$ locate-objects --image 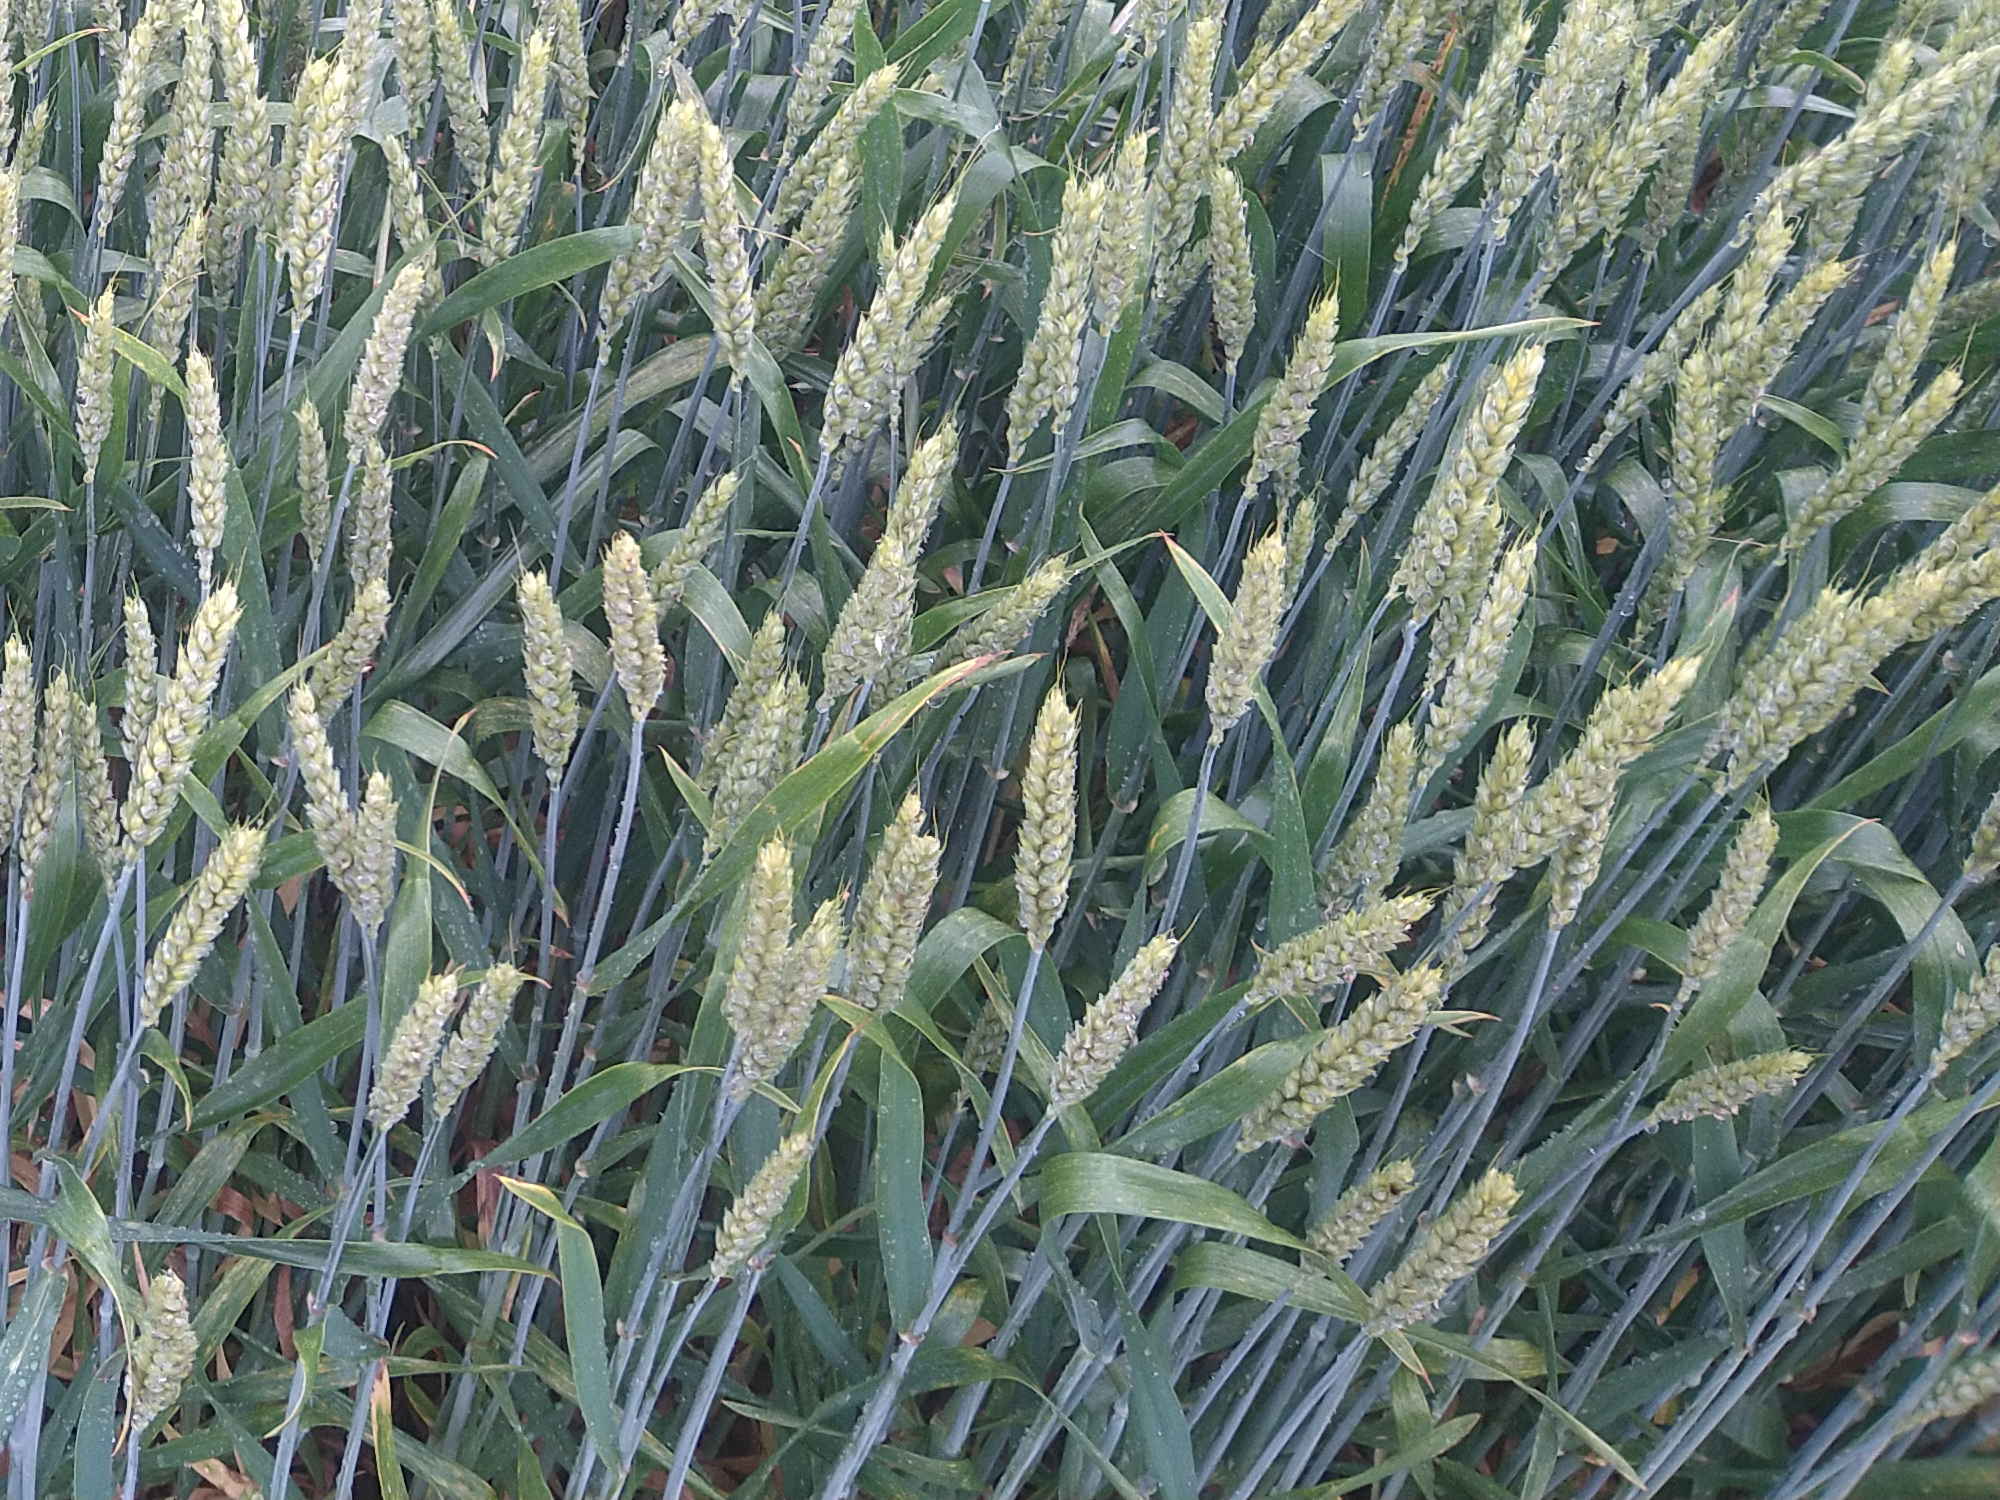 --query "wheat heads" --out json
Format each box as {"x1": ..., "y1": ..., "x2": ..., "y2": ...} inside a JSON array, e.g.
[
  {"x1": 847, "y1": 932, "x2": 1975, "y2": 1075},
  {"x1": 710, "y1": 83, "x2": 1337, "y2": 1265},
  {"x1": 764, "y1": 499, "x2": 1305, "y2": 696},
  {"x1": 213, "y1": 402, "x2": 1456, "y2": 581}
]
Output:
[
  {"x1": 289, "y1": 66, "x2": 349, "y2": 319},
  {"x1": 558, "y1": 0, "x2": 588, "y2": 160},
  {"x1": 731, "y1": 903, "x2": 845, "y2": 1092},
  {"x1": 1319, "y1": 727, "x2": 1420, "y2": 916},
  {"x1": 1049, "y1": 941, "x2": 1179, "y2": 1110},
  {"x1": 1239, "y1": 972, "x2": 1447, "y2": 1150},
  {"x1": 1717, "y1": 224, "x2": 1796, "y2": 349},
  {"x1": 1654, "y1": 1052, "x2": 1812, "y2": 1119},
  {"x1": 518, "y1": 570, "x2": 578, "y2": 783},
  {"x1": 1492, "y1": 663, "x2": 1701, "y2": 864},
  {"x1": 1715, "y1": 267, "x2": 1852, "y2": 440},
  {"x1": 1210, "y1": 0, "x2": 1382, "y2": 165},
  {"x1": 1582, "y1": 286, "x2": 1722, "y2": 460},
  {"x1": 288, "y1": 685, "x2": 353, "y2": 887},
  {"x1": 430, "y1": 966, "x2": 525, "y2": 1116},
  {"x1": 601, "y1": 533, "x2": 666, "y2": 711},
  {"x1": 861, "y1": 248, "x2": 943, "y2": 360},
  {"x1": 712, "y1": 1138, "x2": 812, "y2": 1276},
  {"x1": 1530, "y1": 150, "x2": 1646, "y2": 297},
  {"x1": 881, "y1": 435, "x2": 955, "y2": 562},
  {"x1": 960, "y1": 1001, "x2": 1011, "y2": 1089},
  {"x1": 1210, "y1": 169, "x2": 1256, "y2": 353},
  {"x1": 73, "y1": 700, "x2": 123, "y2": 879},
  {"x1": 1248, "y1": 302, "x2": 1342, "y2": 485},
  {"x1": 1932, "y1": 940, "x2": 2000, "y2": 1069},
  {"x1": 27, "y1": 277, "x2": 47, "y2": 346},
  {"x1": 827, "y1": 196, "x2": 958, "y2": 397},
  {"x1": 1418, "y1": 547, "x2": 1537, "y2": 784},
  {"x1": 148, "y1": 145, "x2": 183, "y2": 272},
  {"x1": 821, "y1": 525, "x2": 925, "y2": 697},
  {"x1": 1789, "y1": 375, "x2": 1965, "y2": 547},
  {"x1": 647, "y1": 475, "x2": 741, "y2": 622},
  {"x1": 1249, "y1": 896, "x2": 1435, "y2": 1004},
  {"x1": 78, "y1": 0, "x2": 124, "y2": 59},
  {"x1": 343, "y1": 265, "x2": 429, "y2": 459},
  {"x1": 1897, "y1": 1352, "x2": 2000, "y2": 1431},
  {"x1": 821, "y1": 298, "x2": 952, "y2": 478},
  {"x1": 851, "y1": 838, "x2": 943, "y2": 1014},
  {"x1": 1329, "y1": 366, "x2": 1451, "y2": 548},
  {"x1": 1550, "y1": 750, "x2": 1618, "y2": 923},
  {"x1": 1367, "y1": 1174, "x2": 1523, "y2": 1324},
  {"x1": 217, "y1": 0, "x2": 254, "y2": 101},
  {"x1": 1426, "y1": 509, "x2": 1504, "y2": 684},
  {"x1": 668, "y1": 0, "x2": 788, "y2": 56},
  {"x1": 390, "y1": 0, "x2": 433, "y2": 129},
  {"x1": 122, "y1": 586, "x2": 245, "y2": 854},
  {"x1": 1493, "y1": 28, "x2": 1635, "y2": 224},
  {"x1": 296, "y1": 477, "x2": 332, "y2": 557},
  {"x1": 297, "y1": 402, "x2": 330, "y2": 554},
  {"x1": 310, "y1": 580, "x2": 393, "y2": 720},
  {"x1": 15, "y1": 103, "x2": 50, "y2": 177},
  {"x1": 187, "y1": 352, "x2": 228, "y2": 547},
  {"x1": 599, "y1": 107, "x2": 703, "y2": 334},
  {"x1": 1398, "y1": 31, "x2": 1533, "y2": 257},
  {"x1": 926, "y1": 565, "x2": 1068, "y2": 680},
  {"x1": 1150, "y1": 23, "x2": 1219, "y2": 275},
  {"x1": 345, "y1": 0, "x2": 388, "y2": 73},
  {"x1": 1706, "y1": 537, "x2": 2000, "y2": 781},
  {"x1": 1757, "y1": 0, "x2": 1889, "y2": 69},
  {"x1": 1686, "y1": 814, "x2": 1780, "y2": 979},
  {"x1": 772, "y1": 72, "x2": 901, "y2": 222},
  {"x1": 354, "y1": 444, "x2": 394, "y2": 595},
  {"x1": 147, "y1": 214, "x2": 206, "y2": 393},
  {"x1": 1856, "y1": 42, "x2": 1916, "y2": 122},
  {"x1": 171, "y1": 27, "x2": 213, "y2": 210},
  {"x1": 351, "y1": 774, "x2": 400, "y2": 925},
  {"x1": 722, "y1": 848, "x2": 772, "y2": 1100},
  {"x1": 1777, "y1": 56, "x2": 1996, "y2": 201},
  {"x1": 1451, "y1": 724, "x2": 1531, "y2": 934},
  {"x1": 18, "y1": 678, "x2": 71, "y2": 887},
  {"x1": 1810, "y1": 197, "x2": 1866, "y2": 267},
  {"x1": 130, "y1": 1274, "x2": 198, "y2": 1431},
  {"x1": 96, "y1": 24, "x2": 152, "y2": 230},
  {"x1": 0, "y1": 169, "x2": 19, "y2": 367},
  {"x1": 1303, "y1": 1163, "x2": 1416, "y2": 1270},
  {"x1": 849, "y1": 795, "x2": 921, "y2": 941},
  {"x1": 976, "y1": 995, "x2": 1047, "y2": 1089},
  {"x1": 695, "y1": 616, "x2": 787, "y2": 787},
  {"x1": 0, "y1": 643, "x2": 35, "y2": 866},
  {"x1": 367, "y1": 977, "x2": 459, "y2": 1127},
  {"x1": 1149, "y1": 249, "x2": 1220, "y2": 334},
  {"x1": 1395, "y1": 352, "x2": 1546, "y2": 606},
  {"x1": 189, "y1": 477, "x2": 229, "y2": 555},
  {"x1": 707, "y1": 681, "x2": 798, "y2": 851},
  {"x1": 1521, "y1": 250, "x2": 1582, "y2": 315},
  {"x1": 1947, "y1": 368, "x2": 2000, "y2": 432},
  {"x1": 1855, "y1": 252, "x2": 1959, "y2": 445},
  {"x1": 1007, "y1": 0, "x2": 1118, "y2": 84},
  {"x1": 1016, "y1": 688, "x2": 1078, "y2": 944},
  {"x1": 141, "y1": 831, "x2": 268, "y2": 1026},
  {"x1": 1007, "y1": 184, "x2": 1106, "y2": 397},
  {"x1": 382, "y1": 137, "x2": 446, "y2": 321},
  {"x1": 783, "y1": 0, "x2": 874, "y2": 156},
  {"x1": 778, "y1": 677, "x2": 809, "y2": 778},
  {"x1": 1004, "y1": 252, "x2": 1091, "y2": 453},
  {"x1": 206, "y1": 249, "x2": 244, "y2": 305},
  {"x1": 699, "y1": 126, "x2": 754, "y2": 366},
  {"x1": 25, "y1": 0, "x2": 58, "y2": 53},
  {"x1": 433, "y1": 0, "x2": 492, "y2": 186},
  {"x1": 481, "y1": 39, "x2": 551, "y2": 268},
  {"x1": 1283, "y1": 498, "x2": 1316, "y2": 605},
  {"x1": 1631, "y1": 480, "x2": 1731, "y2": 649},
  {"x1": 1668, "y1": 353, "x2": 1718, "y2": 575},
  {"x1": 1937, "y1": 71, "x2": 2000, "y2": 204},
  {"x1": 1094, "y1": 134, "x2": 1150, "y2": 331},
  {"x1": 1352, "y1": 0, "x2": 1442, "y2": 130},
  {"x1": 821, "y1": 436, "x2": 956, "y2": 700},
  {"x1": 76, "y1": 288, "x2": 117, "y2": 471},
  {"x1": 282, "y1": 62, "x2": 329, "y2": 170},
  {"x1": 1963, "y1": 784, "x2": 2000, "y2": 879},
  {"x1": 1789, "y1": 476, "x2": 1911, "y2": 548},
  {"x1": 1550, "y1": 37, "x2": 1733, "y2": 251},
  {"x1": 1257, "y1": 0, "x2": 1341, "y2": 34},
  {"x1": 1928, "y1": 280, "x2": 2000, "y2": 338},
  {"x1": 725, "y1": 842, "x2": 793, "y2": 1027},
  {"x1": 752, "y1": 170, "x2": 854, "y2": 345},
  {"x1": 1205, "y1": 538, "x2": 1287, "y2": 738},
  {"x1": 1942, "y1": 0, "x2": 2000, "y2": 60},
  {"x1": 1888, "y1": 487, "x2": 2000, "y2": 591},
  {"x1": 1440, "y1": 885, "x2": 1496, "y2": 980}
]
